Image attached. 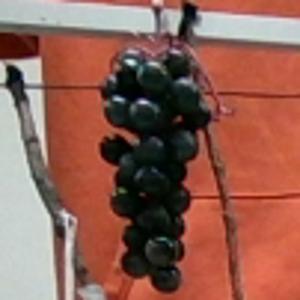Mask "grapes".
Here are the masks:
<instances>
[{
    "label": "grapes",
    "mask_w": 300,
    "mask_h": 300,
    "mask_svg": "<svg viewBox=\"0 0 300 300\" xmlns=\"http://www.w3.org/2000/svg\"><path fill=\"white\" fill-rule=\"evenodd\" d=\"M119 65L99 81L102 113L109 127L140 142L132 144L123 134L111 132L99 140L98 154L115 168L110 210L130 221L120 233L127 248L120 266L128 279L148 277L156 292L173 296L183 286L176 263L186 254L180 239L187 231L181 215L191 206L190 190L183 184L187 163L198 156V132L212 126L216 109L190 79L194 65L184 49L146 60L142 51L129 48L120 55Z\"/></svg>",
    "instance_id": "01657485"
}]
</instances>
